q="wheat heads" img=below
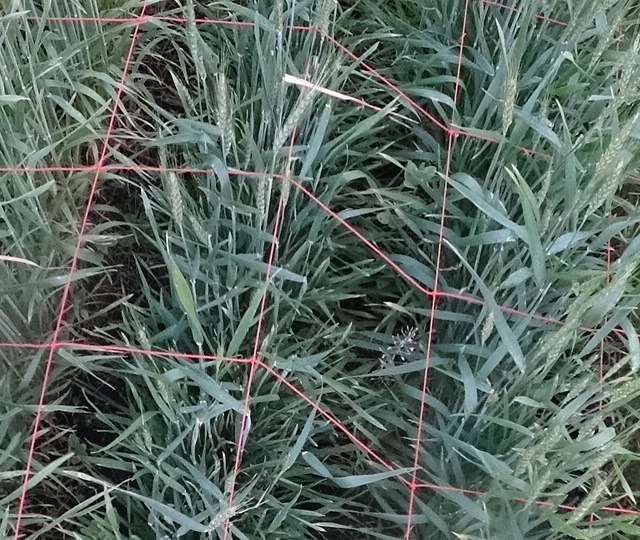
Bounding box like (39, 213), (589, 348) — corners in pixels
(599, 113), (639, 171)
(542, 426), (558, 449)
(589, 16), (620, 60)
(208, 508), (235, 530)
(319, 3), (329, 39)
(273, 79), (325, 145)
(572, 479), (607, 522)
(477, 312), (495, 339)
(532, 169), (555, 200)
(585, 167), (623, 220)
(537, 319), (572, 351)
(519, 447), (536, 472)
(225, 470), (236, 491)
(584, 441), (620, 470)
(158, 383), (170, 401)
(255, 183), (266, 211)
(155, 129), (167, 167)
(560, 380), (586, 404)
(532, 98), (547, 149)
(526, 472), (550, 511)
(139, 330), (151, 352)
(548, 335), (569, 363)
(617, 39), (639, 98)
(215, 71), (227, 129)
(270, 0), (283, 30)
(579, 414), (600, 436)
(560, 0), (583, 38)
(161, 173), (187, 220)
(612, 377), (638, 402)
(143, 427), (155, 449)
(497, 77), (520, 136)
(184, 2), (199, 55)
(191, 218), (207, 246)
(183, 83), (195, 108)
(570, 277), (598, 314)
